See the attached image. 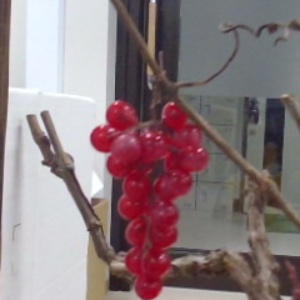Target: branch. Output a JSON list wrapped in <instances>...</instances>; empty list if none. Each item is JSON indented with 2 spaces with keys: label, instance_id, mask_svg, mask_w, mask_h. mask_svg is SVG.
<instances>
[{
  "label": "branch",
  "instance_id": "1",
  "mask_svg": "<svg viewBox=\"0 0 300 300\" xmlns=\"http://www.w3.org/2000/svg\"><path fill=\"white\" fill-rule=\"evenodd\" d=\"M109 3L114 7L126 24L131 39L137 46L138 51L141 53L144 61L149 65L151 71L155 75L158 83L161 85L162 90L165 92L167 97L171 100L174 106L186 117L192 120L196 125H199L202 132L207 137L208 140L212 141L219 150L223 151L230 160H232L242 171L253 180L257 186L255 190V197H250L249 208H252V224L253 233L248 239L250 248H252V255L256 262V275L253 277L252 268L249 265L248 260H244L241 255H237L234 252H229L224 256V261L220 262H210L212 259L219 258L223 255L222 250L215 252H210L203 256L200 253H189L176 257L170 261L171 266L176 267H191L194 262L200 269H222L226 268L231 271L234 275L236 282L248 291L249 300H261V299H271V300H283L280 297L279 291L281 289V283L278 281L272 268H279L280 264L278 262H271L270 255L268 253L267 247L268 242L266 240H261L260 232V222L259 213L263 211V204L267 198V193L281 206L282 210L291 218L293 225L300 229V220L292 211V209L282 200L278 193V186L273 180L268 179V171L264 170L261 174L254 167L249 165L243 158L234 152L223 139L218 136L214 130L208 126L204 121H202L194 112L184 104V101L178 97V88L184 87V85H200L208 84L213 79L217 78L226 67L236 59L237 53L240 46V34L238 33L239 28H244L255 38H259L261 32L267 28L269 33H273L279 29V27H285V36H280L274 39L273 46H276L279 41H288L290 38V31L288 29L300 31V24L297 19H292L289 24L281 23H269L263 24L256 32L251 29L249 25L238 24L236 26H231L225 24L227 29L223 30L224 34L234 31L236 36L235 49L232 56L222 65L221 69L214 75L206 79L205 81L197 82H182L177 84H170L167 81V71H163V55L164 52H159L160 65H156L150 56L145 41L141 38L140 33L137 31L134 24L132 16H130L126 7L124 6L122 0H109Z\"/></svg>",
  "mask_w": 300,
  "mask_h": 300
},
{
  "label": "branch",
  "instance_id": "2",
  "mask_svg": "<svg viewBox=\"0 0 300 300\" xmlns=\"http://www.w3.org/2000/svg\"><path fill=\"white\" fill-rule=\"evenodd\" d=\"M44 128L49 135H45L34 114H27L26 119L32 139L40 147L41 154L44 158L41 164L51 169V173L59 176L65 182L73 200L80 210L82 220L90 232L95 255L103 260L108 267H112L114 276L123 275L127 280L132 281L130 273L125 270L124 255L125 250L116 254L105 244V235L100 218L95 215L91 204L83 194L81 185L78 182L75 173L74 157L69 152H64L60 139L55 131L50 112L41 110L39 112Z\"/></svg>",
  "mask_w": 300,
  "mask_h": 300
}]
</instances>
